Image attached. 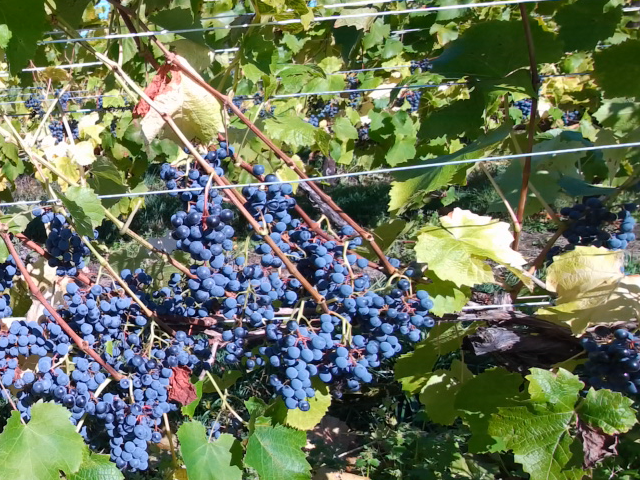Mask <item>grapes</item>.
Here are the masks:
<instances>
[{
    "label": "grapes",
    "instance_id": "b958b902",
    "mask_svg": "<svg viewBox=\"0 0 640 480\" xmlns=\"http://www.w3.org/2000/svg\"><path fill=\"white\" fill-rule=\"evenodd\" d=\"M292 191L291 184L270 185L269 191H262L257 186L242 187L241 193L249 200L245 203L246 209L254 216L262 226L261 213H264L265 223L275 225L277 231L284 232L287 226L291 225L293 230L288 232L289 238L302 249L294 251L290 245L282 240V235L272 232L270 237L289 258L298 262L299 272L312 280L314 286L319 287V293L326 299H334L328 305L330 311L339 309L342 306L346 309L342 316L347 322L352 317L359 314L367 321L368 329L375 334V340H370L364 335H354L351 344L354 348L365 350V354L356 364H351L349 360V349L338 347L335 352L328 354L331 361L330 366H324L321 370L315 364H307L310 361L324 360V352L327 349H335L340 342L341 336L335 332V328L340 324V320L335 315H322L320 322L323 326L314 333L305 324H298L290 321L287 329L292 333L281 331L283 322L281 320L269 323L266 327V335L270 340H276V346L268 347L261 345L259 353L253 356L250 352L242 349L243 339L249 335V331L244 327H234L222 333V340L227 343L225 351V362L228 365H237L239 358L243 355L245 368L252 370L257 366L264 367L266 360L261 356L270 359L272 367L287 368L286 377L290 380V385H285V381L278 374L269 377V384L277 394H282V400L289 409H298L307 412L310 409L309 402L304 399L312 398L315 390L311 388V378L317 375L325 383L334 380L335 375L347 373L353 375L347 379V386L351 392H357L362 388V380L371 383L373 376L368 372V367L379 368L381 361L378 352L382 351L386 359H392L395 354H399L402 345L398 341L396 330L401 336H407L411 342H418L421 339V327L435 328L437 320L432 314H428V309L434 307V300L428 291H418L415 297H409L407 304L411 306L413 315L404 313L405 305L403 296L409 289V283L399 280L397 287L385 298L375 291H367L365 296L353 297L350 299L353 287L341 284L347 279L348 271L342 267L334 258L341 255V245L336 242L320 239L310 242L314 238L313 231L308 227H302V221L298 218L292 219L288 210H293L297 204L294 197L288 198Z\"/></svg>",
    "mask_w": 640,
    "mask_h": 480
},
{
    "label": "grapes",
    "instance_id": "83cd7487",
    "mask_svg": "<svg viewBox=\"0 0 640 480\" xmlns=\"http://www.w3.org/2000/svg\"><path fill=\"white\" fill-rule=\"evenodd\" d=\"M235 152V149L232 145L228 143L221 142L219 144V149H213L212 151H208L204 157L209 162V164L220 174V176L224 175V170L221 165V160H224L226 157H231Z\"/></svg>",
    "mask_w": 640,
    "mask_h": 480
},
{
    "label": "grapes",
    "instance_id": "5460f4e3",
    "mask_svg": "<svg viewBox=\"0 0 640 480\" xmlns=\"http://www.w3.org/2000/svg\"><path fill=\"white\" fill-rule=\"evenodd\" d=\"M43 223H51V229L46 239V247L52 256L62 255V260L52 257L47 261V266L56 268V276L74 277L76 272L85 266L83 256L90 253V248L86 246L84 240L75 233L71 232L69 228H63L66 226V220H64L57 210H46L41 216ZM69 241L72 243V247L75 249V253L72 255V260L75 264L71 265V256L67 253L69 248Z\"/></svg>",
    "mask_w": 640,
    "mask_h": 480
},
{
    "label": "grapes",
    "instance_id": "e5b3c951",
    "mask_svg": "<svg viewBox=\"0 0 640 480\" xmlns=\"http://www.w3.org/2000/svg\"><path fill=\"white\" fill-rule=\"evenodd\" d=\"M19 275L20 272L16 267L15 260L9 254L6 259V268L4 270H0V291H4L5 289L11 290L13 288V277Z\"/></svg>",
    "mask_w": 640,
    "mask_h": 480
},
{
    "label": "grapes",
    "instance_id": "01657485",
    "mask_svg": "<svg viewBox=\"0 0 640 480\" xmlns=\"http://www.w3.org/2000/svg\"><path fill=\"white\" fill-rule=\"evenodd\" d=\"M113 285L102 287L95 284L91 292L86 293L74 282L66 285L68 291L64 295L67 309L64 304L57 306L56 311L63 318L71 319L69 325L73 330L82 332V338L88 343L100 341L105 344L109 340L118 342L112 348V356L107 352L102 358L112 365L115 370H121L123 363L118 361L121 354L129 366H133L136 373L133 375L134 401L127 403L114 393H105L96 403L91 398L99 385L106 381V374L102 372V366L91 355L75 354L72 362L76 368L72 370V378L77 388H72L67 393L69 376L62 368H56L50 372L52 358L46 356L57 353L66 355L68 348L74 340L63 331L56 322H41L33 320H17L11 322L8 333L0 334V368L1 382L10 386L14 382V388L20 390L17 393V410L21 413L24 422H29L32 417V404L48 402L50 397L63 402L66 408H71L70 422L77 424L86 413L96 415L98 419H105L104 428L109 436V456L117 463L120 469L136 472L138 469H149L148 441L159 443L163 435L154 431L152 426L161 423L164 413L177 412L179 402L167 400V389L170 385L168 377L173 375L170 367L186 365L194 368L209 355L208 341L200 338L197 341L184 331H177V342L171 347L163 348L155 344L151 350V356L160 360L134 355L140 351L142 339L139 337L141 327L147 325V318L142 315L138 303L132 302L129 295L122 298L113 296L109 300L100 303L96 296L102 293H111ZM134 316L133 323L136 327L126 337L119 333L121 323L125 322V313ZM40 356L38 360L39 377L33 370H26L21 379L14 381L17 361L13 357Z\"/></svg>",
    "mask_w": 640,
    "mask_h": 480
},
{
    "label": "grapes",
    "instance_id": "2adb6a1f",
    "mask_svg": "<svg viewBox=\"0 0 640 480\" xmlns=\"http://www.w3.org/2000/svg\"><path fill=\"white\" fill-rule=\"evenodd\" d=\"M159 171V178L166 183L167 188L179 187L178 181L185 175V171L183 169L177 171L166 162L161 164Z\"/></svg>",
    "mask_w": 640,
    "mask_h": 480
},
{
    "label": "grapes",
    "instance_id": "54f908b8",
    "mask_svg": "<svg viewBox=\"0 0 640 480\" xmlns=\"http://www.w3.org/2000/svg\"><path fill=\"white\" fill-rule=\"evenodd\" d=\"M134 275L138 277V281L143 282L144 285H149L152 281V276L147 275L143 268H136L134 270Z\"/></svg>",
    "mask_w": 640,
    "mask_h": 480
},
{
    "label": "grapes",
    "instance_id": "0513c4c2",
    "mask_svg": "<svg viewBox=\"0 0 640 480\" xmlns=\"http://www.w3.org/2000/svg\"><path fill=\"white\" fill-rule=\"evenodd\" d=\"M209 195L213 199L209 203V216H206L204 202L199 200L193 205L188 213L177 211L169 216L170 225L175 230L173 240L178 251L191 252L195 260L208 261L213 269H222L220 272H212L207 266L192 265L190 273L197 275L199 279H190L188 287L192 290L191 297H182V288L177 286L181 281L179 273H173L168 287H162L152 292L154 299L169 298L158 305L150 301L151 295L141 291V286L133 278L130 269L121 268L119 273L127 281L134 293L140 297L157 315L182 316L183 318L209 317L208 312H215L221 307V303L216 298L224 297V292L229 288L231 291L245 292L247 288L253 293L247 295V307L243 309L246 297L239 295L235 299L226 298L222 301L224 308L220 309L223 316L230 320L234 316L240 315L249 318L254 327L263 324L262 318L276 315L272 301L282 300L284 307L293 306L298 294L293 290H288V285L283 283L278 272L270 276H262L263 269L259 265H248L235 273L236 268L227 264V256L222 252L232 251L234 243L231 239L235 235V229L229 224L234 221V212L231 209H222L224 199L215 190H211Z\"/></svg>",
    "mask_w": 640,
    "mask_h": 480
},
{
    "label": "grapes",
    "instance_id": "1ff8f66d",
    "mask_svg": "<svg viewBox=\"0 0 640 480\" xmlns=\"http://www.w3.org/2000/svg\"><path fill=\"white\" fill-rule=\"evenodd\" d=\"M346 260L350 265H355L357 268L365 269L368 266L369 261L364 257L357 259L353 254L348 253L346 255Z\"/></svg>",
    "mask_w": 640,
    "mask_h": 480
},
{
    "label": "grapes",
    "instance_id": "ef6de9ee",
    "mask_svg": "<svg viewBox=\"0 0 640 480\" xmlns=\"http://www.w3.org/2000/svg\"><path fill=\"white\" fill-rule=\"evenodd\" d=\"M255 251L259 254H263L261 257L260 265L267 268L280 269L284 268V262L278 257L271 254L272 249L267 246V243L257 244Z\"/></svg>",
    "mask_w": 640,
    "mask_h": 480
},
{
    "label": "grapes",
    "instance_id": "f8a65327",
    "mask_svg": "<svg viewBox=\"0 0 640 480\" xmlns=\"http://www.w3.org/2000/svg\"><path fill=\"white\" fill-rule=\"evenodd\" d=\"M638 210L636 203H628L624 209L619 212V218L622 220L620 232L603 231V221L614 222L616 215L613 212H607L605 208H601V202L596 197H590L585 204H576L571 207H562L560 214L563 217H569L576 222L571 229H567L562 236L569 243L564 245L566 251L572 250L579 242L583 245L592 244L597 248L606 247L608 250L625 249L628 242L635 239L634 229L637 227L635 220L631 217L632 213Z\"/></svg>",
    "mask_w": 640,
    "mask_h": 480
},
{
    "label": "grapes",
    "instance_id": "dcf779d0",
    "mask_svg": "<svg viewBox=\"0 0 640 480\" xmlns=\"http://www.w3.org/2000/svg\"><path fill=\"white\" fill-rule=\"evenodd\" d=\"M6 392L8 393V395H9L10 397H13V391H12V390H10L9 388H6ZM6 392H5L3 389H0V396H1V399H7V394H6Z\"/></svg>",
    "mask_w": 640,
    "mask_h": 480
},
{
    "label": "grapes",
    "instance_id": "84f90ec7",
    "mask_svg": "<svg viewBox=\"0 0 640 480\" xmlns=\"http://www.w3.org/2000/svg\"><path fill=\"white\" fill-rule=\"evenodd\" d=\"M615 335L611 343L597 345L591 336L581 340V348L589 353L584 364L588 373L587 383L595 392L614 391L640 400V355L631 346L640 347V336L625 327L598 326L597 337Z\"/></svg>",
    "mask_w": 640,
    "mask_h": 480
},
{
    "label": "grapes",
    "instance_id": "91a60905",
    "mask_svg": "<svg viewBox=\"0 0 640 480\" xmlns=\"http://www.w3.org/2000/svg\"><path fill=\"white\" fill-rule=\"evenodd\" d=\"M562 248L560 246H555L548 251L547 259L552 261L554 259L555 254L560 253Z\"/></svg>",
    "mask_w": 640,
    "mask_h": 480
}]
</instances>
